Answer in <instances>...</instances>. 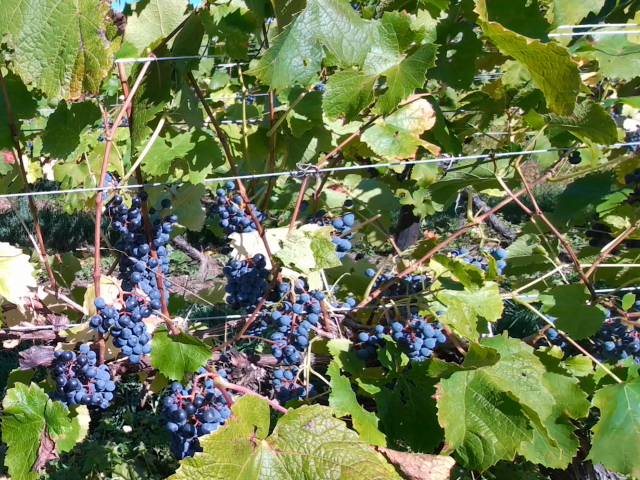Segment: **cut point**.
Masks as SVG:
<instances>
[{"instance_id":"obj_1","label":"cut point","mask_w":640,"mask_h":480,"mask_svg":"<svg viewBox=\"0 0 640 480\" xmlns=\"http://www.w3.org/2000/svg\"><path fill=\"white\" fill-rule=\"evenodd\" d=\"M101 278H104L105 280H107L108 282H110L111 285H113L120 293V297L116 298L115 300H113V303H118V301H120V304L124 303V299H123V294L125 295H133V292H128V291H123L112 279H110L108 276L104 275V274H100Z\"/></svg>"},{"instance_id":"obj_2","label":"cut point","mask_w":640,"mask_h":480,"mask_svg":"<svg viewBox=\"0 0 640 480\" xmlns=\"http://www.w3.org/2000/svg\"><path fill=\"white\" fill-rule=\"evenodd\" d=\"M211 376H212V373H211V372H206V373L198 374V375L194 378V380H193V382H192V388H193V389H196V387H197V385H198V382H199L201 379H203V378H208V377H211Z\"/></svg>"}]
</instances>
